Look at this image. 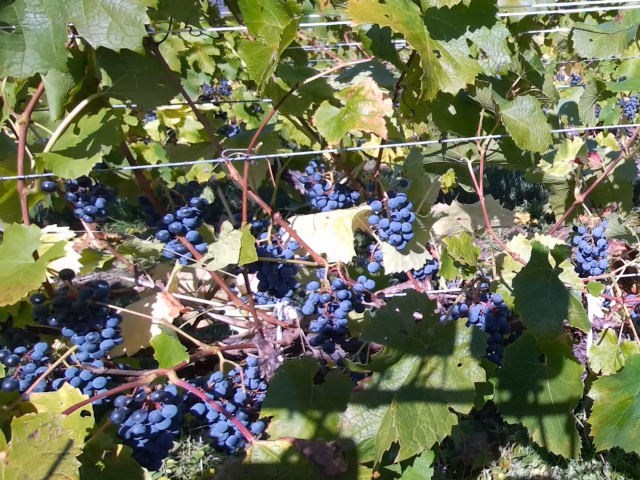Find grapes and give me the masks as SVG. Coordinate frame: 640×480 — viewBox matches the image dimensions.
<instances>
[{"label":"grapes","instance_id":"b958b902","mask_svg":"<svg viewBox=\"0 0 640 480\" xmlns=\"http://www.w3.org/2000/svg\"><path fill=\"white\" fill-rule=\"evenodd\" d=\"M258 375L259 358L248 356L241 372L238 367H233L228 372V378H225L223 372L216 371L208 378L200 377L198 385L207 396L223 406L227 413L235 415L244 429L260 433L264 429V421L250 420L248 414L256 411L267 396L268 383L257 378Z\"/></svg>","mask_w":640,"mask_h":480},{"label":"grapes","instance_id":"54f908b8","mask_svg":"<svg viewBox=\"0 0 640 480\" xmlns=\"http://www.w3.org/2000/svg\"><path fill=\"white\" fill-rule=\"evenodd\" d=\"M492 303L495 307L474 304L468 309L466 305H456L453 309V317L461 319L463 316H467V323L469 325L477 324L479 330L490 331L493 329L507 332L510 320L507 318L506 304L500 292L493 294Z\"/></svg>","mask_w":640,"mask_h":480},{"label":"grapes","instance_id":"802abce8","mask_svg":"<svg viewBox=\"0 0 640 480\" xmlns=\"http://www.w3.org/2000/svg\"><path fill=\"white\" fill-rule=\"evenodd\" d=\"M288 250H282L275 244H265L257 248V253L261 258H276V259H292L294 252L299 249V243L297 241H290L287 244Z\"/></svg>","mask_w":640,"mask_h":480},{"label":"grapes","instance_id":"34c12dc5","mask_svg":"<svg viewBox=\"0 0 640 480\" xmlns=\"http://www.w3.org/2000/svg\"><path fill=\"white\" fill-rule=\"evenodd\" d=\"M377 288V282L373 278L360 275L356 278V282L352 284V290L356 293H362L365 290L373 291Z\"/></svg>","mask_w":640,"mask_h":480},{"label":"grapes","instance_id":"91a60905","mask_svg":"<svg viewBox=\"0 0 640 480\" xmlns=\"http://www.w3.org/2000/svg\"><path fill=\"white\" fill-rule=\"evenodd\" d=\"M49 350V344L47 342H37L34 345V352L30 354L32 362H23L21 364V371L19 372V378L15 375L5 377L1 382V388L6 391H17L18 393H25L32 381H35L39 376H42L47 370L49 356L46 352Z\"/></svg>","mask_w":640,"mask_h":480},{"label":"grapes","instance_id":"f8a65327","mask_svg":"<svg viewBox=\"0 0 640 480\" xmlns=\"http://www.w3.org/2000/svg\"><path fill=\"white\" fill-rule=\"evenodd\" d=\"M190 206H180L177 212H166L162 221L156 223L155 238L163 244V257L165 259H177L181 265H187L192 260V255L184 244L174 239L171 232L180 231L195 249L201 254L208 252V246L202 240V235L197 232L200 228V213L206 207V200L200 195H193L189 200Z\"/></svg>","mask_w":640,"mask_h":480},{"label":"grapes","instance_id":"2adb6a1f","mask_svg":"<svg viewBox=\"0 0 640 480\" xmlns=\"http://www.w3.org/2000/svg\"><path fill=\"white\" fill-rule=\"evenodd\" d=\"M326 164L324 162L310 161L308 166L304 168V173L300 176L302 183L314 184L306 191V196L310 199V204L313 207H317L319 211H331L334 209H340L346 207L349 204H355L360 201V192L358 190H351L349 186H345L342 183H335L333 190L331 184L328 181L321 179V174L318 171H324Z\"/></svg>","mask_w":640,"mask_h":480},{"label":"grapes","instance_id":"1ff8f66d","mask_svg":"<svg viewBox=\"0 0 640 480\" xmlns=\"http://www.w3.org/2000/svg\"><path fill=\"white\" fill-rule=\"evenodd\" d=\"M190 413L202 416L207 425L210 438H217L219 447H227L230 454H236L240 447L245 445L244 431L230 417L225 416L219 410L210 406L203 399H198L190 406Z\"/></svg>","mask_w":640,"mask_h":480},{"label":"grapes","instance_id":"e5b3c951","mask_svg":"<svg viewBox=\"0 0 640 480\" xmlns=\"http://www.w3.org/2000/svg\"><path fill=\"white\" fill-rule=\"evenodd\" d=\"M63 198L74 203L73 215L92 223L96 216H105L108 206L116 201V193L110 187L92 185L87 176L75 177L65 184Z\"/></svg>","mask_w":640,"mask_h":480},{"label":"grapes","instance_id":"01657485","mask_svg":"<svg viewBox=\"0 0 640 480\" xmlns=\"http://www.w3.org/2000/svg\"><path fill=\"white\" fill-rule=\"evenodd\" d=\"M177 387L166 385L154 389L151 400L161 408L136 409L148 397V391L139 387L128 395H117L113 401L116 410L110 413L108 424L117 426V434L130 440L135 448H145L158 441L175 438L181 429V407L176 402Z\"/></svg>","mask_w":640,"mask_h":480},{"label":"grapes","instance_id":"4a4d1313","mask_svg":"<svg viewBox=\"0 0 640 480\" xmlns=\"http://www.w3.org/2000/svg\"><path fill=\"white\" fill-rule=\"evenodd\" d=\"M425 267L421 270H415L412 275L416 278H419L421 281L426 279V274H430L432 271H435L438 268V263L435 260H427L425 262Z\"/></svg>","mask_w":640,"mask_h":480},{"label":"grapes","instance_id":"0513c4c2","mask_svg":"<svg viewBox=\"0 0 640 480\" xmlns=\"http://www.w3.org/2000/svg\"><path fill=\"white\" fill-rule=\"evenodd\" d=\"M44 321L55 328L60 327L61 333L70 344H76V354L69 356L71 363L80 365H104L103 356L106 352L123 346V331L120 324L124 321L121 314H107L103 318L88 320L73 317H61L59 312H53L44 317Z\"/></svg>","mask_w":640,"mask_h":480},{"label":"grapes","instance_id":"9fbda902","mask_svg":"<svg viewBox=\"0 0 640 480\" xmlns=\"http://www.w3.org/2000/svg\"><path fill=\"white\" fill-rule=\"evenodd\" d=\"M367 251L369 253H372L373 251L375 252L371 256V259L373 261H371L366 265V270L371 274H375L378 271L379 267H383L385 265V262L382 260L383 259L382 249L379 246L375 247L373 243H369L367 245Z\"/></svg>","mask_w":640,"mask_h":480},{"label":"grapes","instance_id":"5460f4e3","mask_svg":"<svg viewBox=\"0 0 640 480\" xmlns=\"http://www.w3.org/2000/svg\"><path fill=\"white\" fill-rule=\"evenodd\" d=\"M248 271L250 273L257 271V277L262 279L257 285L256 293V300L261 305L290 301L292 292L301 288V282L291 278L299 273V267L296 264L253 261L248 266Z\"/></svg>","mask_w":640,"mask_h":480},{"label":"grapes","instance_id":"84f90ec7","mask_svg":"<svg viewBox=\"0 0 640 480\" xmlns=\"http://www.w3.org/2000/svg\"><path fill=\"white\" fill-rule=\"evenodd\" d=\"M345 285L343 278L334 279L332 286L339 301L331 302L329 293H310L301 306V315L309 317L317 313V319H312L308 329L316 334L308 339L310 346H319L328 355L335 353L336 345L346 342L347 314L353 306L352 293L349 289L342 288Z\"/></svg>","mask_w":640,"mask_h":480},{"label":"grapes","instance_id":"ef6de9ee","mask_svg":"<svg viewBox=\"0 0 640 480\" xmlns=\"http://www.w3.org/2000/svg\"><path fill=\"white\" fill-rule=\"evenodd\" d=\"M606 228L607 221L600 220L599 227L593 229V237L597 243L595 247L589 242L590 234L587 233L585 226H580L578 228L579 235L574 236L570 241L571 245L577 246V249L574 250L576 261L581 265V268L591 276H601L602 273L607 271V249L610 248V245L606 240V233L604 232Z\"/></svg>","mask_w":640,"mask_h":480},{"label":"grapes","instance_id":"23402543","mask_svg":"<svg viewBox=\"0 0 640 480\" xmlns=\"http://www.w3.org/2000/svg\"><path fill=\"white\" fill-rule=\"evenodd\" d=\"M267 225L268 220L266 218H263L262 220L255 219L251 222L253 230L259 233L258 238L260 240H264L268 236V233L263 229V227H266Z\"/></svg>","mask_w":640,"mask_h":480},{"label":"grapes","instance_id":"83cd7487","mask_svg":"<svg viewBox=\"0 0 640 480\" xmlns=\"http://www.w3.org/2000/svg\"><path fill=\"white\" fill-rule=\"evenodd\" d=\"M387 197L389 198L387 207L390 209L392 220L389 221L387 218L372 214L367 218V223L370 226H379L381 241H386L389 245L396 246L398 251H402L406 248L409 240L414 237L412 223L417 220V216L411 211L413 204L407 200V195L404 192L396 193L390 189Z\"/></svg>","mask_w":640,"mask_h":480},{"label":"grapes","instance_id":"dcf779d0","mask_svg":"<svg viewBox=\"0 0 640 480\" xmlns=\"http://www.w3.org/2000/svg\"><path fill=\"white\" fill-rule=\"evenodd\" d=\"M107 382L106 375L98 376L80 367H69L63 371L62 377L51 381V389L58 390L69 385L74 389H80L82 395L96 396L107 391Z\"/></svg>","mask_w":640,"mask_h":480},{"label":"grapes","instance_id":"62ce99fe","mask_svg":"<svg viewBox=\"0 0 640 480\" xmlns=\"http://www.w3.org/2000/svg\"><path fill=\"white\" fill-rule=\"evenodd\" d=\"M46 387H47V379L43 378L42 380L39 381V383L35 386V388L32 389V392L36 394L45 392Z\"/></svg>","mask_w":640,"mask_h":480},{"label":"grapes","instance_id":"012428b0","mask_svg":"<svg viewBox=\"0 0 640 480\" xmlns=\"http://www.w3.org/2000/svg\"><path fill=\"white\" fill-rule=\"evenodd\" d=\"M26 353L27 348L25 346L15 347L13 351L8 346H1L0 362L3 363L5 368H14Z\"/></svg>","mask_w":640,"mask_h":480}]
</instances>
